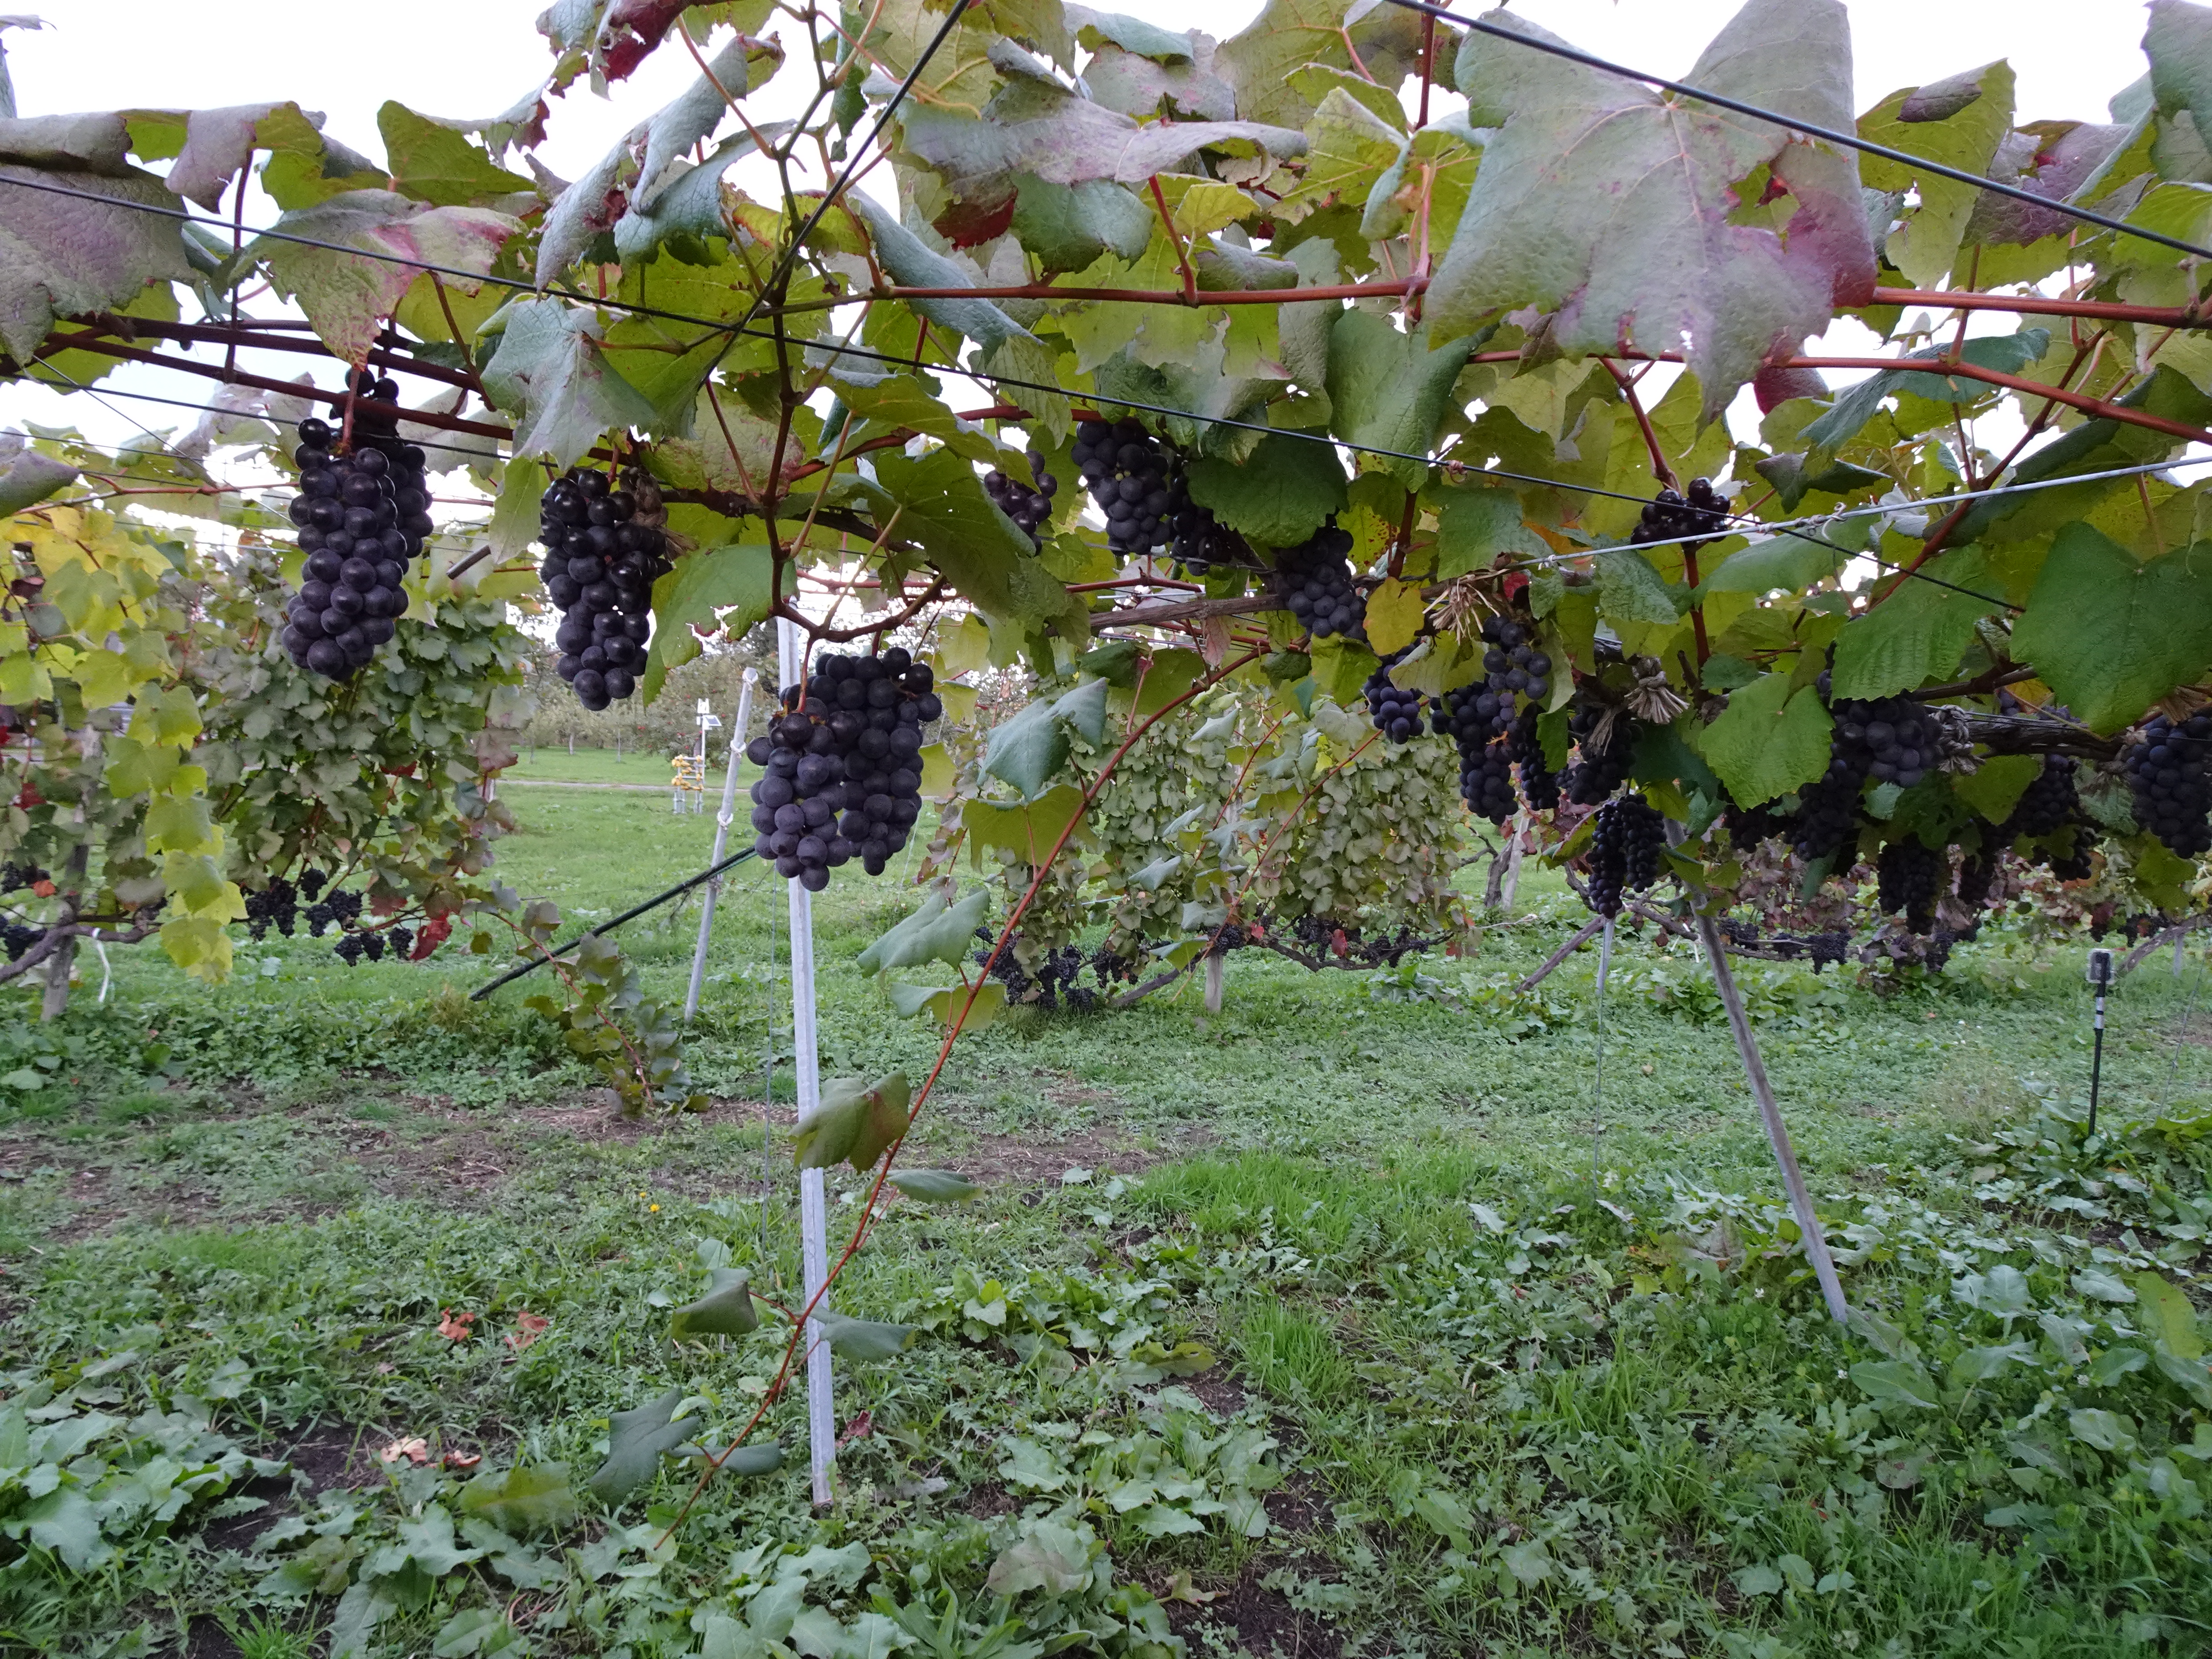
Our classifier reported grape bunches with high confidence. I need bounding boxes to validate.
[280,418,410,683]
[1037,961,1066,1014]
[1925,926,1952,974]
[2115,909,2145,950]
[1514,720,1568,816]
[969,933,1028,984]
[1999,685,2026,720]
[1867,699,1951,793]
[1167,451,1247,583]
[1048,937,1085,985]
[1873,818,1910,918]
[1565,688,1643,809]
[1903,842,1946,936]
[1790,759,1862,866]
[1614,793,1665,894]
[0,913,54,964]
[1070,417,1175,559]
[1820,671,1861,785]
[296,862,330,902]
[1285,530,1363,644]
[1631,475,1733,553]
[534,466,677,714]
[2088,904,2118,945]
[1774,935,1809,965]
[1358,934,1392,962]
[1587,812,1627,923]
[304,899,334,945]
[1067,985,1099,1009]
[1205,921,1252,954]
[1480,613,1555,701]
[1588,636,1648,665]
[332,937,364,967]
[2034,748,2083,828]
[359,927,396,967]
[779,647,943,876]
[326,887,364,928]
[1089,937,1125,990]
[1722,915,1761,949]
[1126,946,1151,995]
[2043,812,2109,880]
[1721,795,1791,856]
[744,711,852,892]
[1810,927,1852,975]
[385,919,418,961]
[1293,904,1344,958]
[1005,977,1035,1006]
[985,447,1055,556]
[0,856,59,892]
[1432,690,1525,827]
[329,365,433,562]
[1957,824,2004,904]
[249,876,295,940]
[2108,700,2209,862]
[1363,645,1427,744]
